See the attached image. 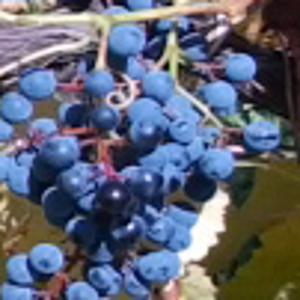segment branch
I'll use <instances>...</instances> for the list:
<instances>
[{"label": "branch", "mask_w": 300, "mask_h": 300, "mask_svg": "<svg viewBox=\"0 0 300 300\" xmlns=\"http://www.w3.org/2000/svg\"><path fill=\"white\" fill-rule=\"evenodd\" d=\"M227 6L219 1H194L184 4H162L150 9L139 11H123L117 13H71L53 14L42 17H27L13 12L0 11V20L23 26H47L57 23L92 22L93 24H105L110 21L112 24L127 22H144L155 20L166 16L169 12H180L182 15H189L199 12H215L224 14Z\"/></svg>", "instance_id": "30e6481e"}]
</instances>
